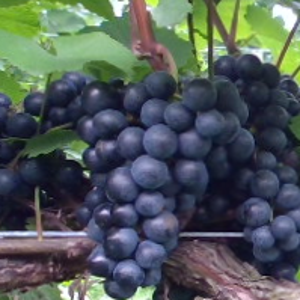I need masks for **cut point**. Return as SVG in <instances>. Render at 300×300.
<instances>
[{"instance_id": "6a23745f", "label": "cut point", "mask_w": 300, "mask_h": 300, "mask_svg": "<svg viewBox=\"0 0 300 300\" xmlns=\"http://www.w3.org/2000/svg\"><path fill=\"white\" fill-rule=\"evenodd\" d=\"M155 49L157 52L164 55L165 60L167 61L168 67H169V73L173 77L176 82H179V74L177 71L176 62L174 61L173 55L170 53V50H168L166 47H164L162 44H156Z\"/></svg>"}]
</instances>
